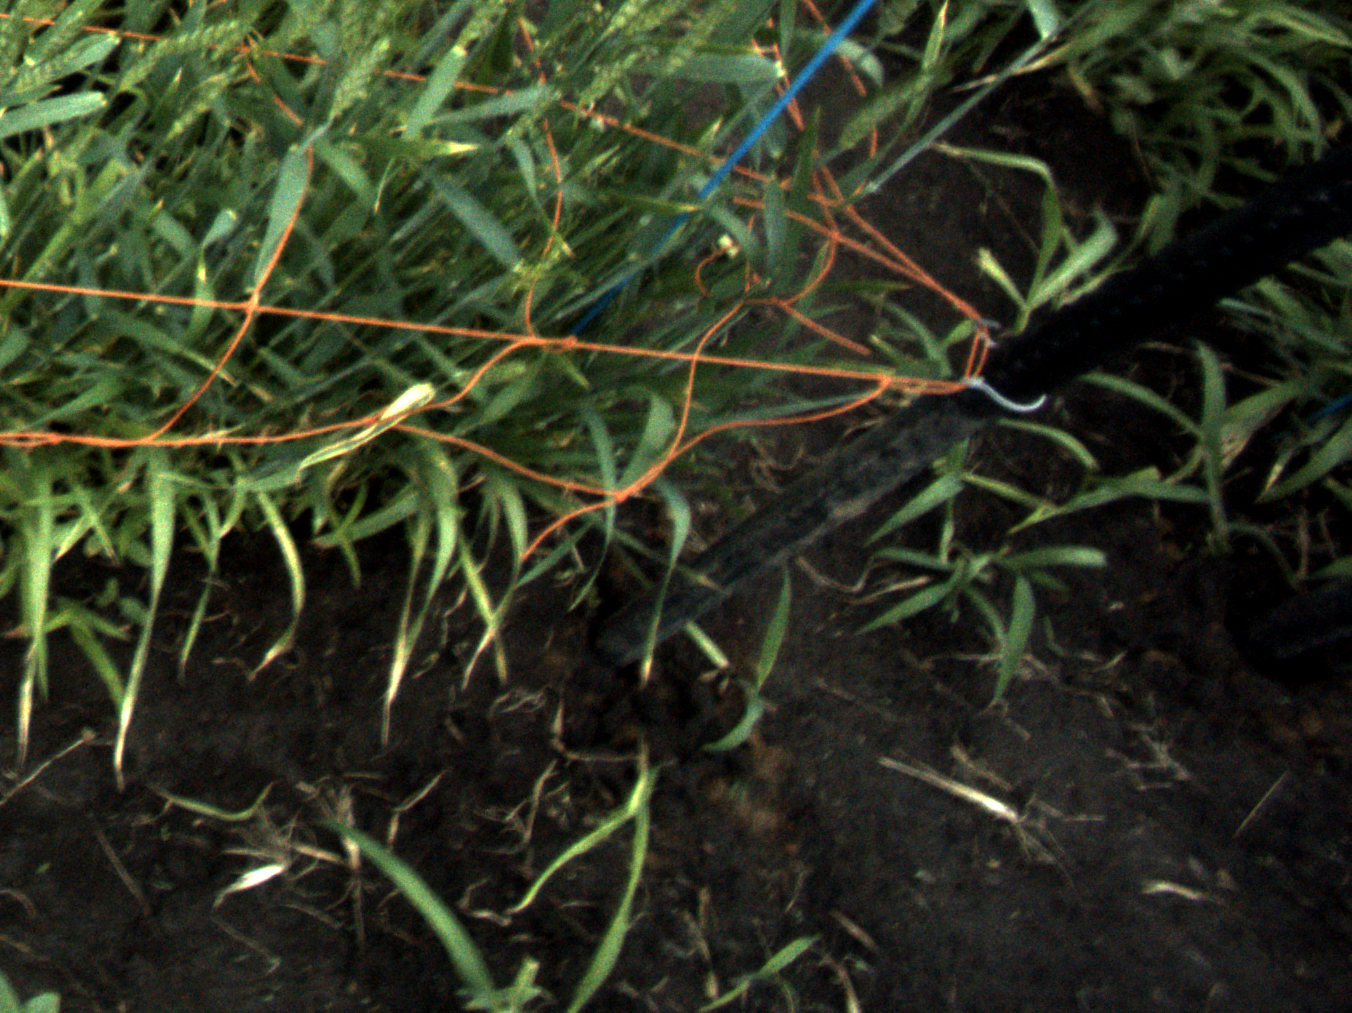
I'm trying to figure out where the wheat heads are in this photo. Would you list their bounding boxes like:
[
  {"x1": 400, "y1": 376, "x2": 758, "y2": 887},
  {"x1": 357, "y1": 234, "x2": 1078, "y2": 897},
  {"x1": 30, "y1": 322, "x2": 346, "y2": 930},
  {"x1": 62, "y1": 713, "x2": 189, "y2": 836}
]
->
[
  {"x1": 454, "y1": 360, "x2": 528, "y2": 389},
  {"x1": 329, "y1": 34, "x2": 395, "y2": 117},
  {"x1": 551, "y1": 8, "x2": 586, "y2": 43},
  {"x1": 117, "y1": 40, "x2": 169, "y2": 93},
  {"x1": 608, "y1": 0, "x2": 682, "y2": 35},
  {"x1": 0, "y1": 0, "x2": 27, "y2": 68},
  {"x1": 0, "y1": 41, "x2": 20, "y2": 82},
  {"x1": 664, "y1": 0, "x2": 740, "y2": 76},
  {"x1": 835, "y1": 77, "x2": 927, "y2": 154},
  {"x1": 518, "y1": 245, "x2": 567, "y2": 291},
  {"x1": 37, "y1": 12, "x2": 83, "y2": 61},
  {"x1": 161, "y1": 77, "x2": 231, "y2": 144},
  {"x1": 510, "y1": 92, "x2": 556, "y2": 137},
  {"x1": 10, "y1": 50, "x2": 77, "y2": 92},
  {"x1": 59, "y1": 126, "x2": 93, "y2": 178},
  {"x1": 365, "y1": 0, "x2": 398, "y2": 42},
  {"x1": 872, "y1": 0, "x2": 949, "y2": 35},
  {"x1": 626, "y1": 42, "x2": 661, "y2": 56},
  {"x1": 210, "y1": 26, "x2": 251, "y2": 64},
  {"x1": 297, "y1": 51, "x2": 321, "y2": 89},
  {"x1": 624, "y1": 0, "x2": 707, "y2": 40},
  {"x1": 337, "y1": 0, "x2": 372, "y2": 54},
  {"x1": 576, "y1": 53, "x2": 640, "y2": 109},
  {"x1": 456, "y1": 0, "x2": 514, "y2": 45},
  {"x1": 282, "y1": 0, "x2": 332, "y2": 49},
  {"x1": 168, "y1": 16, "x2": 240, "y2": 56},
  {"x1": 580, "y1": 9, "x2": 610, "y2": 48}
]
